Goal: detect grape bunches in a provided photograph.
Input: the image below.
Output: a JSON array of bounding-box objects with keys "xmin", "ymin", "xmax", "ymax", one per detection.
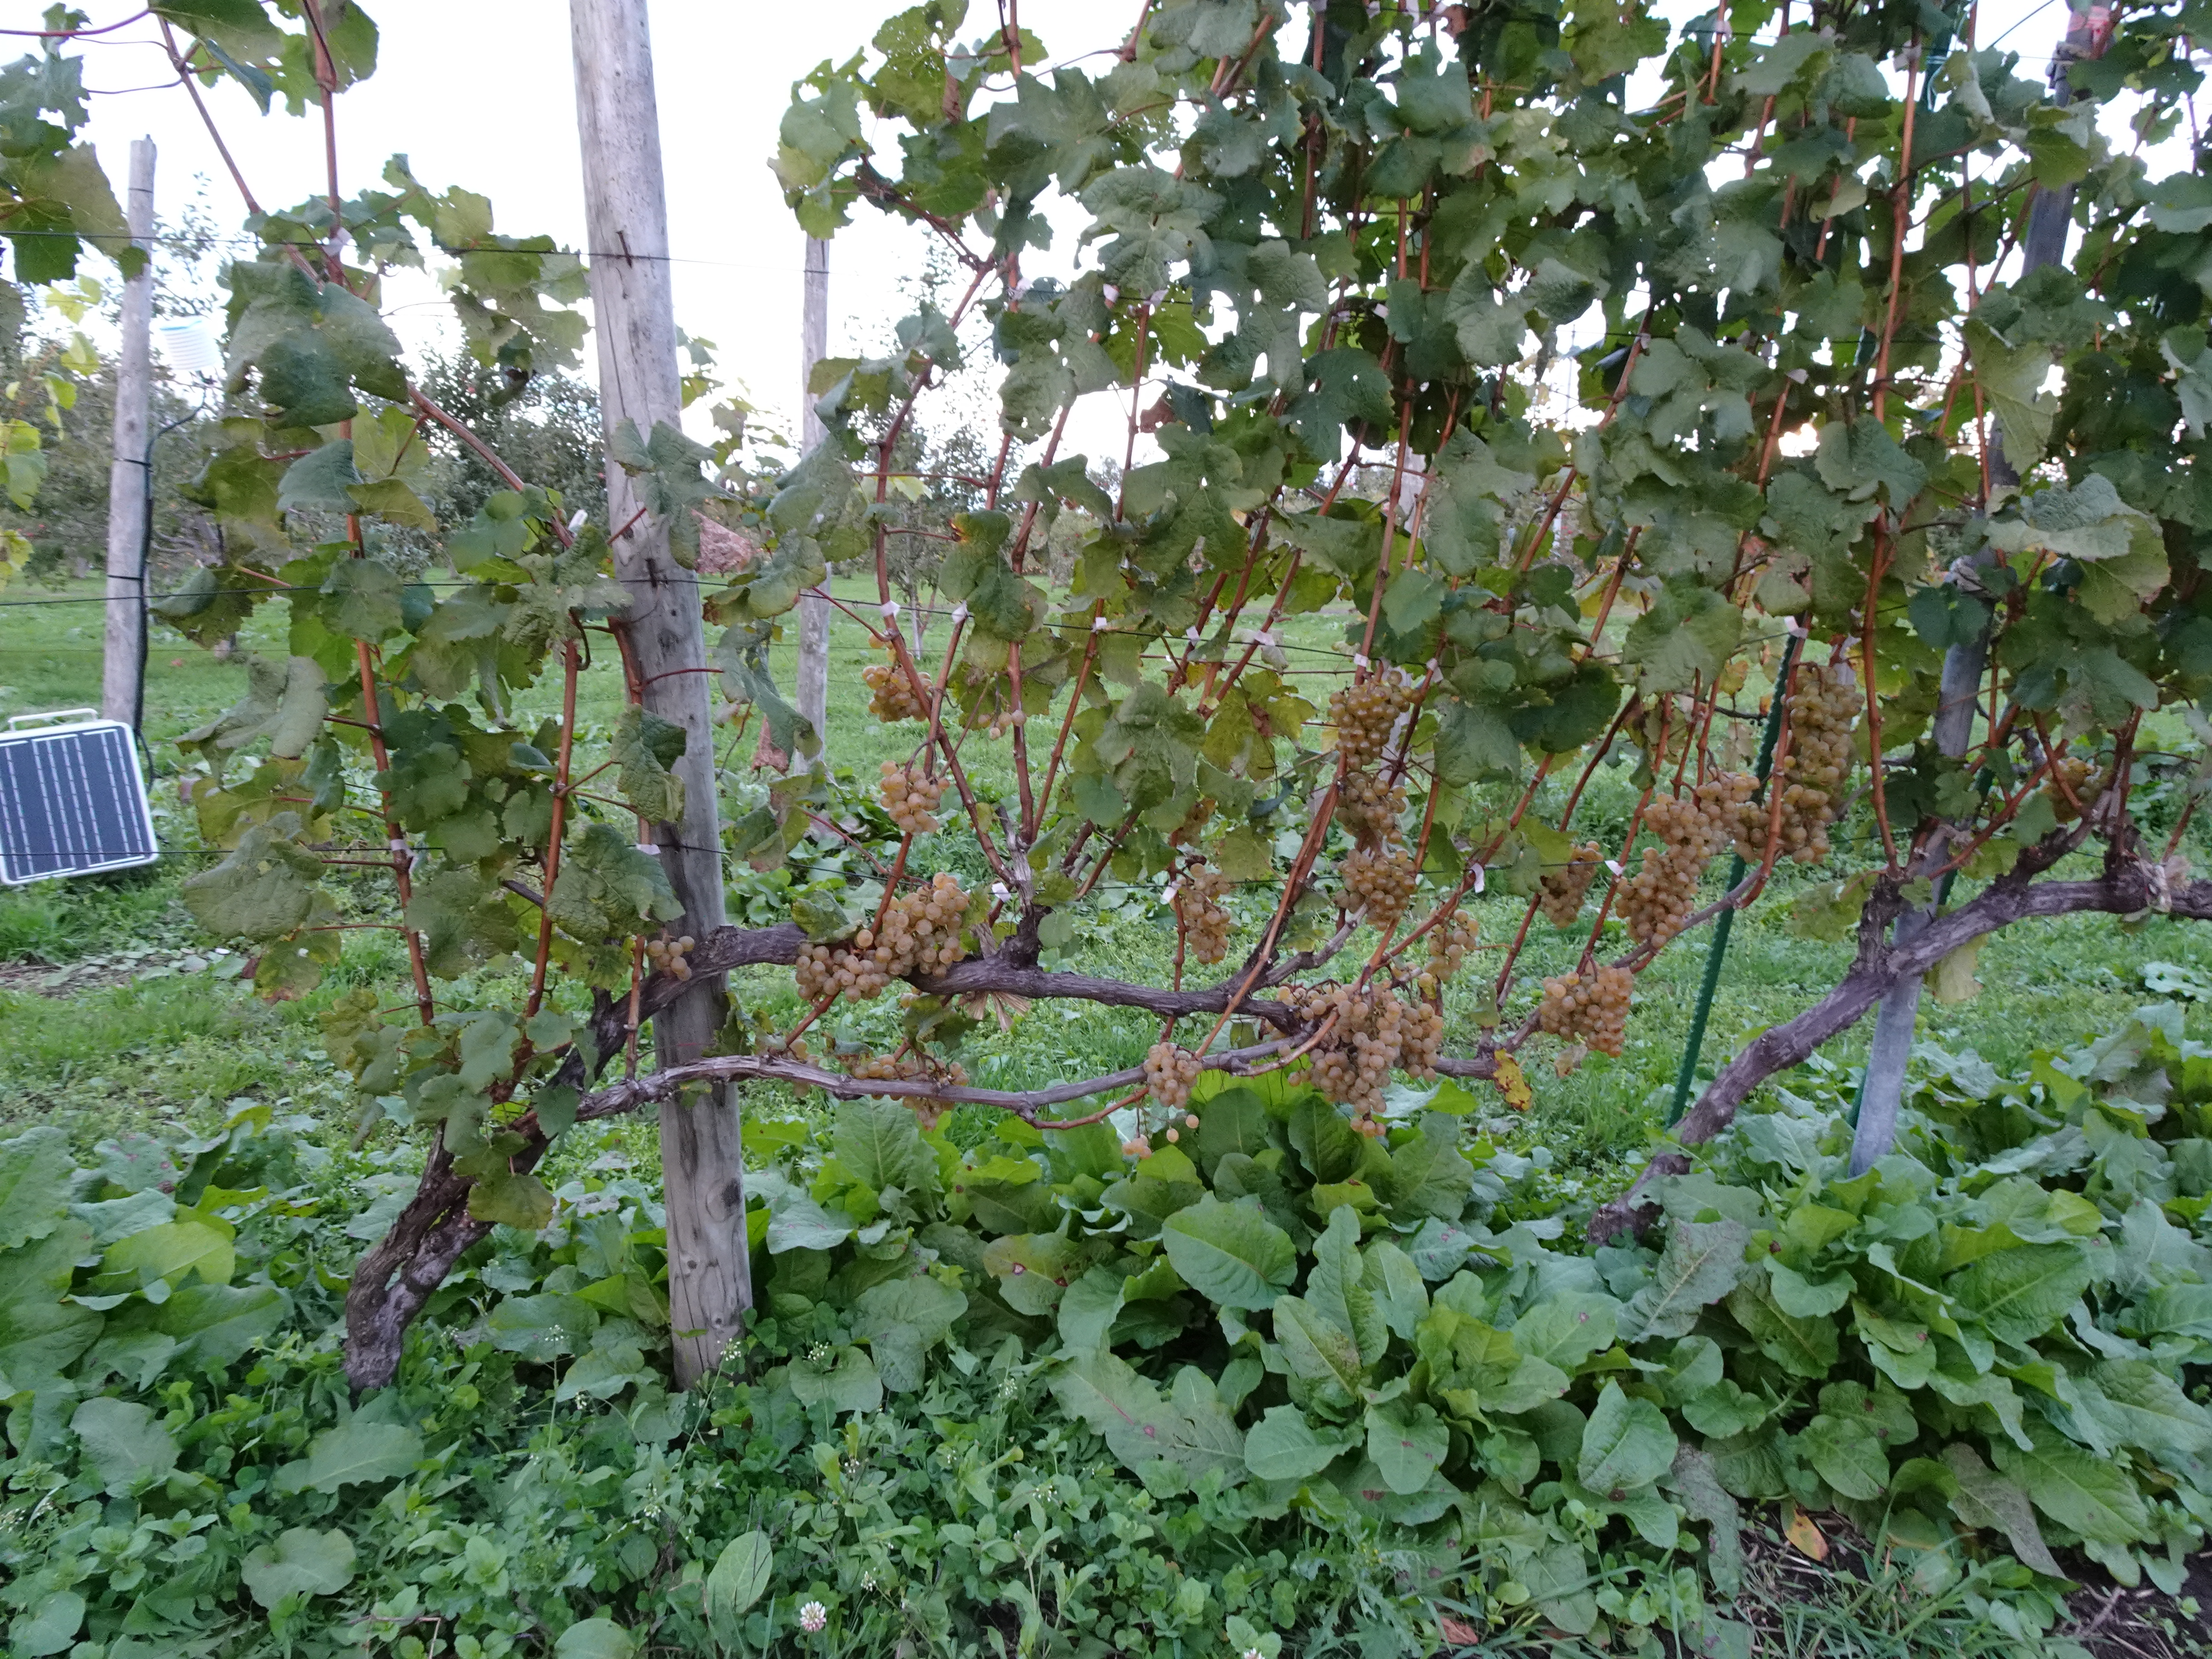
[
  {"xmin": 1782, "ymin": 663, "xmax": 1865, "ymax": 784},
  {"xmin": 1539, "ymin": 970, "xmax": 1588, "ymax": 1041},
  {"xmin": 895, "ymin": 984, "xmax": 967, "ymax": 1040},
  {"xmin": 1537, "ymin": 840, "xmax": 1606, "ymax": 930},
  {"xmin": 829, "ymin": 1054, "xmax": 967, "ymax": 1131},
  {"xmin": 794, "ymin": 942, "xmax": 879, "ymax": 1007},
  {"xmin": 1418, "ymin": 905, "xmax": 1481, "ymax": 993},
  {"xmin": 1584, "ymin": 965, "xmax": 1635, "ymax": 1058},
  {"xmin": 1645, "ymin": 792, "xmax": 1711, "ymax": 877},
  {"xmin": 912, "ymin": 914, "xmax": 971, "ymax": 976},
  {"xmin": 1166, "ymin": 864, "xmax": 1232, "ymax": 966},
  {"xmin": 2043, "ymin": 755, "xmax": 2098, "ymax": 827},
  {"xmin": 1730, "ymin": 796, "xmax": 1775, "ymax": 867},
  {"xmin": 1389, "ymin": 959, "xmax": 1419, "ymax": 982},
  {"xmin": 782, "ymin": 1030, "xmax": 821, "ymax": 1104},
  {"xmin": 1330, "ymin": 858, "xmax": 1365, "ymax": 914},
  {"xmin": 1334, "ymin": 773, "xmax": 1411, "ymax": 850},
  {"xmin": 449, "ymin": 1165, "xmax": 485, "ymax": 1236},
  {"xmin": 647, "ymin": 934, "xmax": 698, "ymax": 984},
  {"xmin": 1356, "ymin": 848, "xmax": 1420, "ymax": 932},
  {"xmin": 1615, "ymin": 870, "xmax": 1702, "ymax": 953},
  {"xmin": 1165, "ymin": 1113, "xmax": 1200, "ymax": 1144},
  {"xmin": 1174, "ymin": 797, "xmax": 1217, "ymax": 850},
  {"xmin": 1289, "ymin": 1047, "xmax": 1358, "ymax": 1103},
  {"xmin": 1401, "ymin": 1001, "xmax": 1448, "ymax": 1082},
  {"xmin": 1325, "ymin": 669, "xmax": 1424, "ymax": 769},
  {"xmin": 1276, "ymin": 983, "xmax": 1345, "ymax": 1021},
  {"xmin": 886, "ymin": 876, "xmax": 979, "ymax": 920},
  {"xmin": 1263, "ymin": 1017, "xmax": 1295, "ymax": 1056},
  {"xmin": 879, "ymin": 759, "xmax": 951, "ymax": 839},
  {"xmin": 860, "ymin": 630, "xmax": 937, "ymax": 725},
  {"xmin": 1696, "ymin": 768, "xmax": 1762, "ymax": 828},
  {"xmin": 1779, "ymin": 785, "xmax": 1836, "ymax": 867},
  {"xmin": 855, "ymin": 908, "xmax": 913, "ymax": 987},
  {"xmin": 1144, "ymin": 1042, "xmax": 1205, "ymax": 1110},
  {"xmin": 1337, "ymin": 980, "xmax": 1400, "ymax": 1144},
  {"xmin": 978, "ymin": 706, "xmax": 1028, "ymax": 742},
  {"xmin": 1122, "ymin": 1131, "xmax": 1157, "ymax": 1161}
]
